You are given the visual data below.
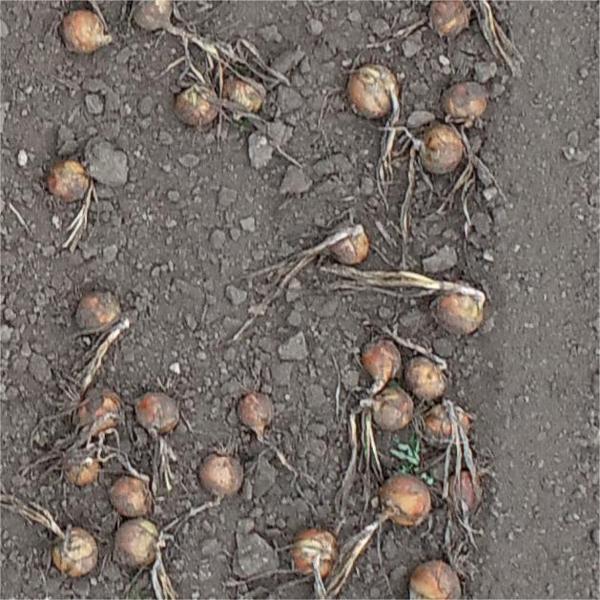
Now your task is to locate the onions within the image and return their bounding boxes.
[347,66,397,119]
[196,452,242,495]
[112,518,157,563]
[75,289,118,331]
[135,392,180,434]
[223,77,260,113]
[406,357,445,399]
[409,560,459,599]
[60,6,108,53]
[133,1,170,33]
[292,530,336,578]
[327,224,365,262]
[47,159,86,199]
[372,388,412,428]
[378,474,431,523]
[418,127,463,173]
[434,287,482,333]
[427,2,465,36]
[53,528,97,574]
[175,84,213,126]
[444,80,486,119]
[359,341,401,384]
[422,403,462,440]
[235,393,272,431]
[81,390,121,434]
[110,475,152,516]
[65,450,100,485]
[448,472,477,514]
